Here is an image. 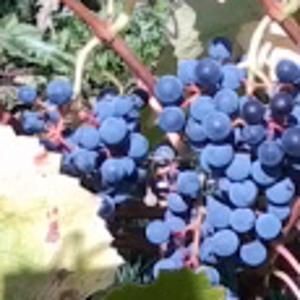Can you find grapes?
Masks as SVG:
<instances>
[{
    "label": "grapes",
    "instance_id": "obj_2",
    "mask_svg": "<svg viewBox=\"0 0 300 300\" xmlns=\"http://www.w3.org/2000/svg\"><path fill=\"white\" fill-rule=\"evenodd\" d=\"M45 112L32 110L20 118L25 135L40 133L41 142L52 155H62L60 170L71 178L94 180L104 185L98 193V216L110 219L117 206L131 200L121 189L138 174L136 162L151 150L143 135L142 110L149 103V91L136 87L121 93L108 87L95 97L67 78H54L46 86Z\"/></svg>",
    "mask_w": 300,
    "mask_h": 300
},
{
    "label": "grapes",
    "instance_id": "obj_1",
    "mask_svg": "<svg viewBox=\"0 0 300 300\" xmlns=\"http://www.w3.org/2000/svg\"><path fill=\"white\" fill-rule=\"evenodd\" d=\"M208 54L182 59L176 76L152 86L165 105L158 128L178 135L151 163L177 169L163 218L146 224L144 239L169 256L154 263V277L197 270L218 286L223 257L265 263L300 191V65L282 58L275 74L247 80L243 66L226 62L234 56L228 37L213 36Z\"/></svg>",
    "mask_w": 300,
    "mask_h": 300
}]
</instances>
